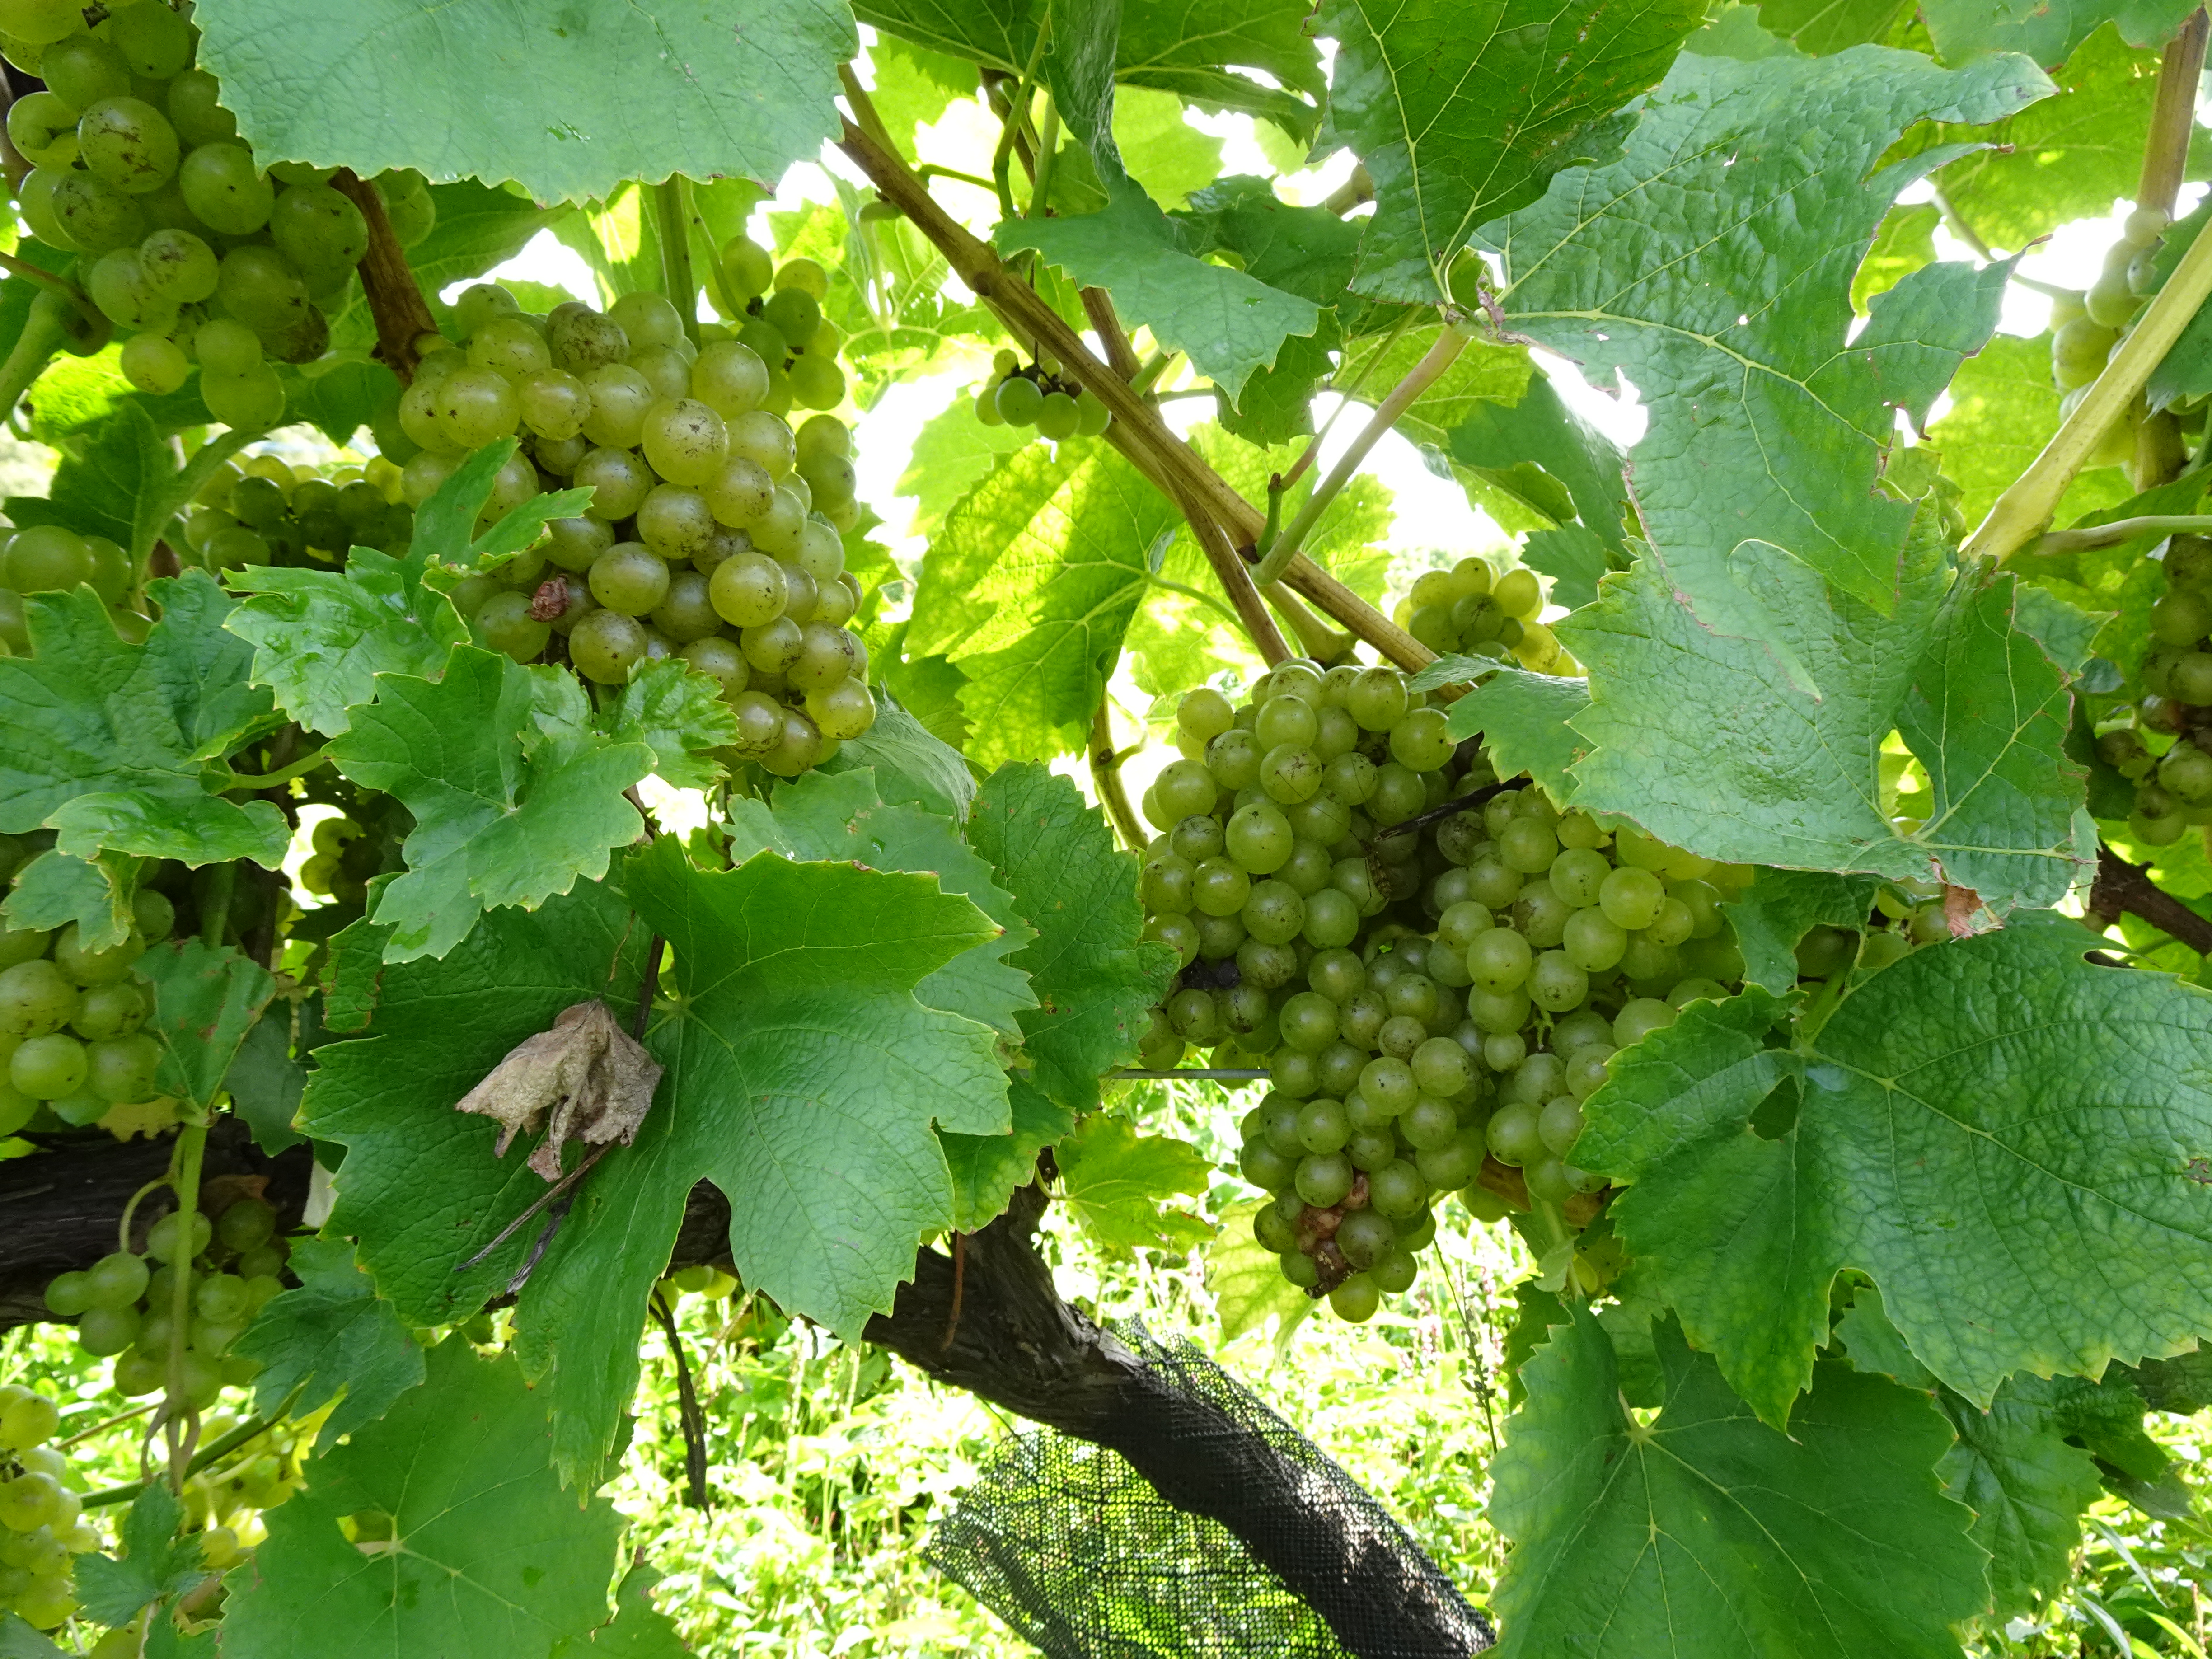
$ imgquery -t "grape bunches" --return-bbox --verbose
[0,830,176,1138]
[2094,538,2212,846]
[399,283,876,776]
[0,1384,98,1631]
[1460,976,1732,1298]
[1423,745,1755,1072]
[1379,560,1560,760]
[116,1416,283,1567]
[0,525,154,653]
[45,1183,285,1414]
[708,236,860,535]
[1771,881,1952,1036]
[183,453,417,584]
[1242,935,1493,1321]
[0,0,435,433]
[300,783,418,903]
[269,889,294,948]
[975,349,1112,441]
[1137,654,1459,1089]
